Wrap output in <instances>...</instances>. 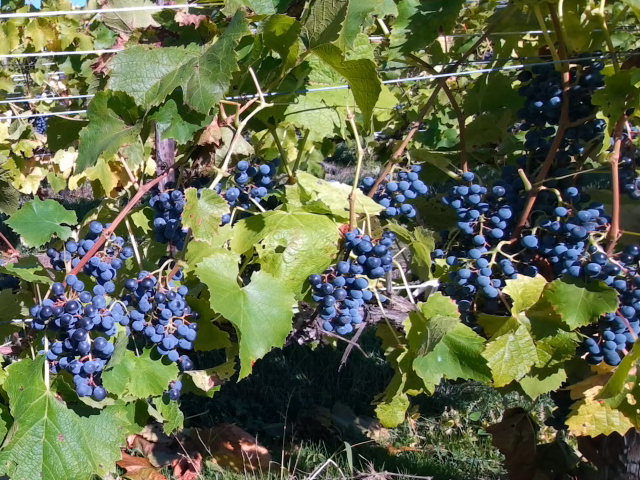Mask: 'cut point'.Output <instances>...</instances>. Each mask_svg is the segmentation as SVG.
Masks as SVG:
<instances>
[{"instance_id": "1", "label": "cut point", "mask_w": 640, "mask_h": 480, "mask_svg": "<svg viewBox=\"0 0 640 480\" xmlns=\"http://www.w3.org/2000/svg\"><path fill=\"white\" fill-rule=\"evenodd\" d=\"M354 200L361 206L362 211H363V215L365 217V220L369 221L370 220V215L368 213V209H367L366 204L363 202V200L357 194H354Z\"/></svg>"}, {"instance_id": "2", "label": "cut point", "mask_w": 640, "mask_h": 480, "mask_svg": "<svg viewBox=\"0 0 640 480\" xmlns=\"http://www.w3.org/2000/svg\"><path fill=\"white\" fill-rule=\"evenodd\" d=\"M540 191H553L557 197V200L558 201L562 200V195L560 193V190L555 186H541Z\"/></svg>"}, {"instance_id": "3", "label": "cut point", "mask_w": 640, "mask_h": 480, "mask_svg": "<svg viewBox=\"0 0 640 480\" xmlns=\"http://www.w3.org/2000/svg\"><path fill=\"white\" fill-rule=\"evenodd\" d=\"M510 241L511 240H503V241H499L495 247L493 248V252L496 254H500L501 253V247L505 246V245H510Z\"/></svg>"}]
</instances>
